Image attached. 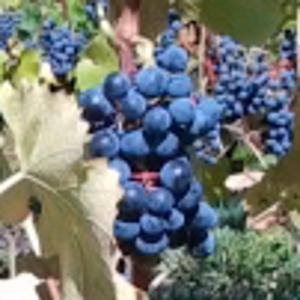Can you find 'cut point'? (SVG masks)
<instances>
[{"label":"cut point","instance_id":"obj_1","mask_svg":"<svg viewBox=\"0 0 300 300\" xmlns=\"http://www.w3.org/2000/svg\"><path fill=\"white\" fill-rule=\"evenodd\" d=\"M134 40L136 42H139L143 45L144 50V56H145V61L149 66H152L155 63V57L153 56V43L150 39L142 36V35H136L134 37Z\"/></svg>","mask_w":300,"mask_h":300}]
</instances>
